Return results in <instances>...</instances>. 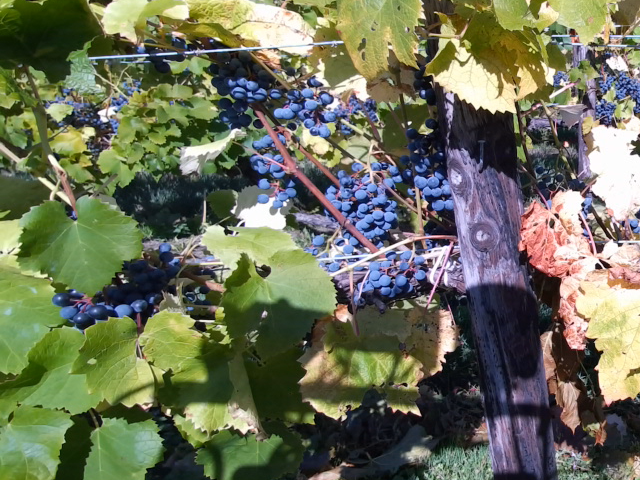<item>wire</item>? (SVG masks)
<instances>
[{
	"instance_id": "d2f4af69",
	"label": "wire",
	"mask_w": 640,
	"mask_h": 480,
	"mask_svg": "<svg viewBox=\"0 0 640 480\" xmlns=\"http://www.w3.org/2000/svg\"><path fill=\"white\" fill-rule=\"evenodd\" d=\"M342 39H330L321 42H296L287 45H257L248 46L242 48H225V49H190L181 52H154L146 54H120V55H106V56H93L89 55L88 59L91 61H108V60H122V59H148L156 57H183L193 54H227V53H244L250 51L259 50H289L299 47H323L332 44H342Z\"/></svg>"
}]
</instances>
